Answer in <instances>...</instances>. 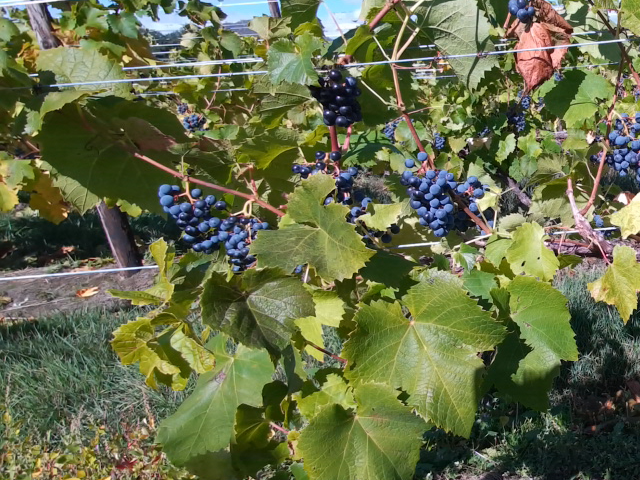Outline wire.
<instances>
[{"label":"wire","mask_w":640,"mask_h":480,"mask_svg":"<svg viewBox=\"0 0 640 480\" xmlns=\"http://www.w3.org/2000/svg\"><path fill=\"white\" fill-rule=\"evenodd\" d=\"M639 37H624V38H611L603 41H581L577 43H569V44H548L544 46H525V47H517L510 49H502L495 51H482L477 53H459V54H443L437 56H413L406 57L401 59H384L372 62H353V63H344V68H355V67H374L386 64H404L408 62L415 61H439L445 59H461V58H479L485 56H497L504 54H512V53H520L527 51H546L550 49H571V48H579L585 46H605L613 43H626V42H639Z\"/></svg>","instance_id":"obj_1"},{"label":"wire","mask_w":640,"mask_h":480,"mask_svg":"<svg viewBox=\"0 0 640 480\" xmlns=\"http://www.w3.org/2000/svg\"><path fill=\"white\" fill-rule=\"evenodd\" d=\"M268 73L267 69L264 70H234L222 73H191L185 75H167V76H152L133 79H108V80H83L78 82H57L42 84V89H51L59 87H80L85 85H110V84H135L154 81H169V80H188V79H209V78H224L236 75H265Z\"/></svg>","instance_id":"obj_2"},{"label":"wire","mask_w":640,"mask_h":480,"mask_svg":"<svg viewBox=\"0 0 640 480\" xmlns=\"http://www.w3.org/2000/svg\"><path fill=\"white\" fill-rule=\"evenodd\" d=\"M159 264H148L141 266H122V267H110L105 269H92V270H73L67 272H57L53 274H27L23 276H10L0 277V282H12V281H25L29 279H55L60 277H69L76 275H94V274H107L112 272H124V271H144L150 269H159Z\"/></svg>","instance_id":"obj_3"},{"label":"wire","mask_w":640,"mask_h":480,"mask_svg":"<svg viewBox=\"0 0 640 480\" xmlns=\"http://www.w3.org/2000/svg\"><path fill=\"white\" fill-rule=\"evenodd\" d=\"M250 62L267 63L268 59L264 57H248V58H241V59L194 61V62H184V63H176V64L147 65V66H140V67L124 66L123 70L132 71V72H143V71H149V70H166V69H178V68L196 67V66L243 64V63H250Z\"/></svg>","instance_id":"obj_4"},{"label":"wire","mask_w":640,"mask_h":480,"mask_svg":"<svg viewBox=\"0 0 640 480\" xmlns=\"http://www.w3.org/2000/svg\"><path fill=\"white\" fill-rule=\"evenodd\" d=\"M441 241L440 240H431L428 242H421V243H407V244H397V245H389L388 249L389 250H400V249H409V248H424V247H430L433 245H440Z\"/></svg>","instance_id":"obj_5"}]
</instances>
